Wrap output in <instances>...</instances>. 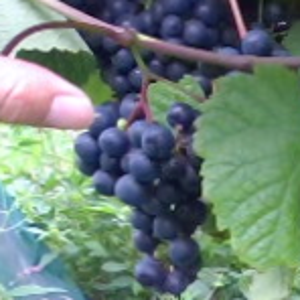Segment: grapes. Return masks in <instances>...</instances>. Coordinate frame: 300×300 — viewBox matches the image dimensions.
<instances>
[{"label":"grapes","mask_w":300,"mask_h":300,"mask_svg":"<svg viewBox=\"0 0 300 300\" xmlns=\"http://www.w3.org/2000/svg\"><path fill=\"white\" fill-rule=\"evenodd\" d=\"M200 115L176 102L161 118L153 117L148 96L128 93L101 103L95 121L73 144L78 169L93 175L102 194H116L138 208L131 219L139 230L134 246L146 258L134 277L162 294L181 293L204 266L202 245L193 236L207 220L201 200L204 159L192 147Z\"/></svg>","instance_id":"01657485"}]
</instances>
